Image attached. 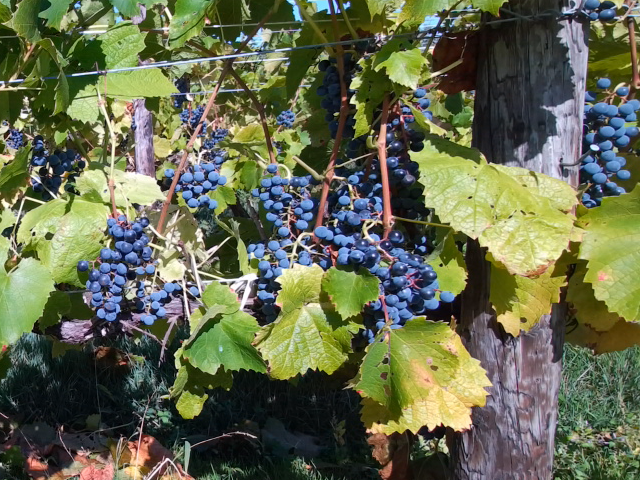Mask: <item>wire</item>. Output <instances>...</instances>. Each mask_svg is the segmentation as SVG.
Returning a JSON list of instances; mask_svg holds the SVG:
<instances>
[{
	"mask_svg": "<svg viewBox=\"0 0 640 480\" xmlns=\"http://www.w3.org/2000/svg\"><path fill=\"white\" fill-rule=\"evenodd\" d=\"M582 14H583L582 10H570L567 12H549V13H542L537 15H517L515 17H509V18L483 20V21L474 22V23L457 24V25H452L447 27L423 29L419 31L392 32V33H387V34H384L378 37H373V38L353 39L350 41H339L335 43L309 44V45L300 46V47H279V48H271L268 50H262L258 52L241 53L238 55L215 56L210 58L194 59V60H188V61H159L152 64L144 65V66H135V67H128L123 69H103V70L72 72V73H67L66 78L70 79L75 77L105 75V74H125L130 72L146 71V70L158 68L161 66H190V65H197V64L212 63L217 61L240 60L244 58L260 57L264 55H270V54L281 53V52H303L311 49L337 48L341 46H352L355 44L375 43V42H380V41H383L389 38H395V37L421 36V35L432 34V33L455 31L459 29L482 27L486 25L511 23V22H517L519 20H539L544 18L569 17L572 15H582Z\"/></svg>",
	"mask_w": 640,
	"mask_h": 480,
	"instance_id": "1",
	"label": "wire"
}]
</instances>
